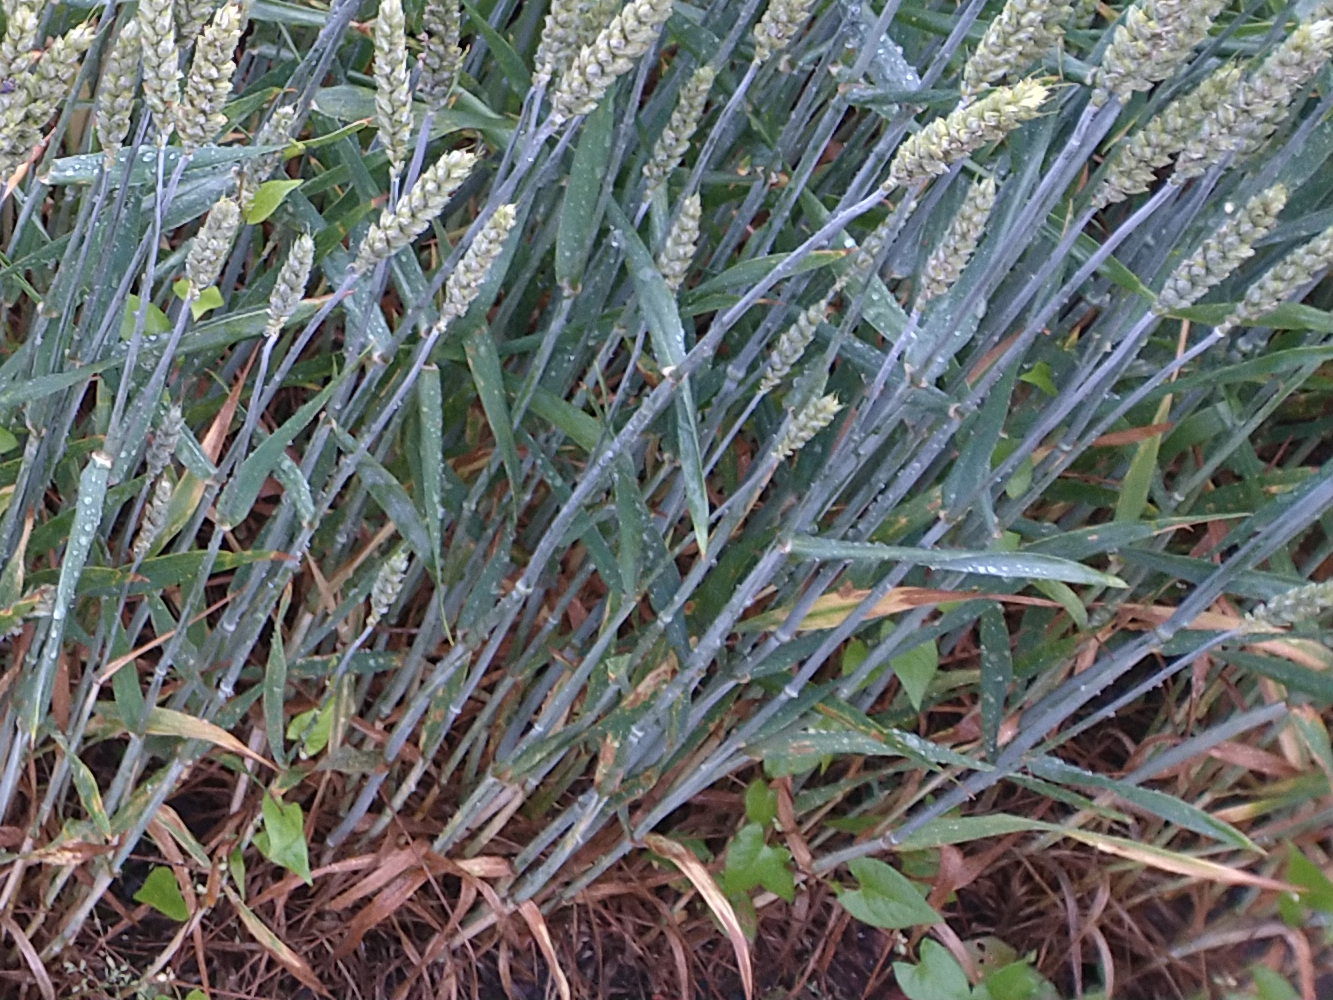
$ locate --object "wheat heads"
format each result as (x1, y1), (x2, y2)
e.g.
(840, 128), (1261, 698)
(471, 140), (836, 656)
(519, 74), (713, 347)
(1003, 0), (1087, 83)
(135, 481), (173, 561)
(918, 177), (998, 314)
(180, 6), (244, 150)
(555, 0), (701, 119)
(1220, 228), (1333, 330)
(643, 68), (714, 195)
(755, 0), (832, 61)
(1155, 188), (1288, 311)
(148, 404), (183, 474)
(0, 30), (101, 178)
(534, 0), (599, 82)
(138, 0), (182, 133)
(890, 83), (1054, 180)
(371, 548), (409, 622)
(558, 0), (623, 70)
(1104, 73), (1239, 192)
(777, 396), (841, 454)
(186, 200), (243, 294)
(174, 0), (252, 44)
(353, 153), (478, 273)
(963, 0), (1098, 98)
(420, 0), (462, 109)
(0, 6), (32, 147)
(659, 195), (703, 291)
(1139, 0), (1246, 81)
(267, 237), (315, 331)
(96, 23), (142, 152)
(439, 205), (518, 328)
(1168, 27), (1333, 182)
(838, 197), (918, 286)
(240, 110), (297, 209)
(375, 0), (412, 164)
(760, 303), (830, 390)
(1092, 0), (1227, 96)
(1250, 582), (1333, 625)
